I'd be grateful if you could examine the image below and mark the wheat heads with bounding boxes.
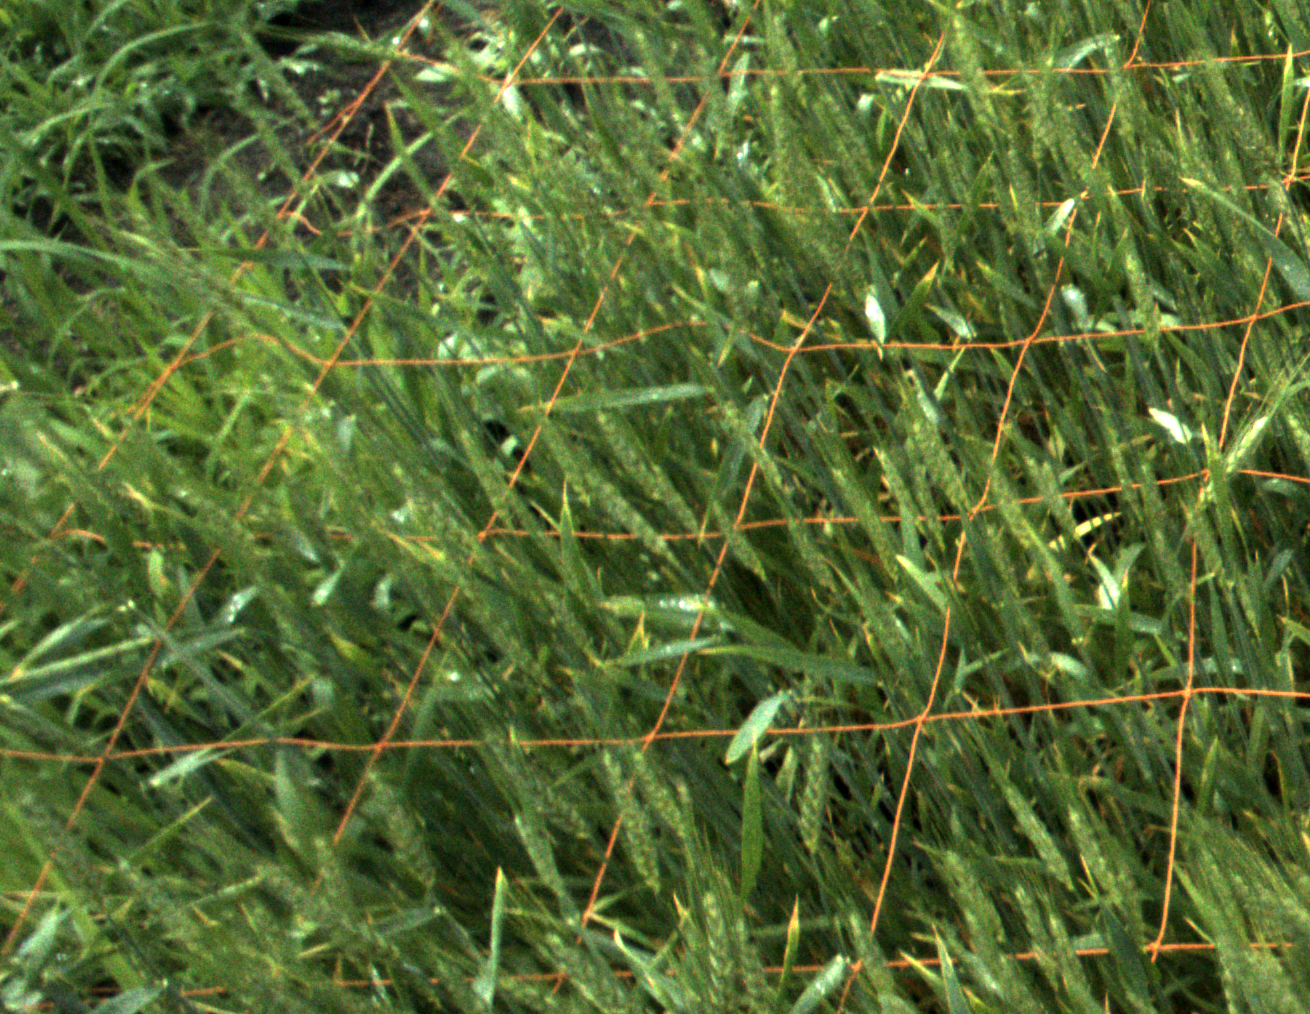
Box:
[119,428,188,490]
[533,400,585,494]
[577,185,628,252]
[1150,137,1199,208]
[600,751,663,890]
[1015,608,1062,681]
[1049,910,1093,995]
[1027,72,1051,159]
[1262,10,1280,46]
[658,594,721,616]
[683,984,752,1014]
[309,26,409,66]
[1201,848,1243,929]
[444,181,513,208]
[736,916,779,1013]
[161,179,229,252]
[364,767,439,892]
[496,970,640,1014]
[1124,250,1165,347]
[942,847,1009,944]
[9,789,118,919]
[1050,99,1091,172]
[1253,326,1301,415]
[1260,948,1310,1014]
[1135,458,1171,534]
[1214,927,1247,1014]
[847,910,897,992]
[744,224,768,272]
[947,42,993,137]
[1258,169,1310,266]
[1183,497,1235,593]
[1234,0,1261,50]
[487,103,535,174]
[1073,0,1097,37]
[648,464,699,532]
[511,813,565,897]
[1066,808,1125,905]
[159,258,239,326]
[945,148,980,224]
[994,287,1021,351]
[800,741,828,858]
[1102,44,1128,96]
[782,513,833,589]
[908,413,976,517]
[983,519,1018,588]
[388,463,485,563]
[831,467,901,581]
[718,396,783,491]
[439,130,494,202]
[428,947,531,1014]
[1150,523,1195,600]
[302,404,360,485]
[211,158,289,241]
[251,572,305,636]
[624,153,677,205]
[243,973,280,1014]
[855,571,903,652]
[676,794,709,874]
[1184,120,1221,182]
[772,11,809,107]
[427,196,494,272]
[726,267,754,328]
[457,421,516,521]
[999,780,1074,890]
[999,959,1110,1014]
[993,0,1018,27]
[713,493,771,579]
[221,904,253,944]
[266,72,317,128]
[1139,156,1157,201]
[768,84,793,203]
[531,921,680,1014]
[1220,146,1253,224]
[336,993,453,1014]
[526,581,592,649]
[1229,560,1259,626]
[630,27,679,114]
[691,182,728,252]
[245,860,415,971]
[1106,432,1142,509]
[138,209,261,332]
[794,166,845,269]
[1003,149,1042,228]
[1113,86,1138,147]
[694,40,737,148]
[121,858,215,970]
[907,458,946,535]
[1119,984,1183,1014]
[1019,70,1060,146]
[582,474,670,554]
[934,191,960,265]
[1259,886,1290,940]
[1011,883,1062,996]
[482,0,533,44]
[1104,0,1147,45]
[1186,187,1231,250]
[164,484,267,566]
[481,730,591,836]
[1112,870,1150,948]
[251,112,304,187]
[1290,409,1310,507]
[835,144,881,221]
[310,836,359,951]
[453,572,556,682]
[251,901,298,957]
[953,13,994,106]
[821,90,876,160]
[631,744,684,831]
[1279,896,1310,1014]
[604,172,666,242]
[482,150,520,214]
[507,0,546,48]
[1043,458,1081,532]
[1197,416,1268,508]
[594,405,663,495]
[1268,0,1309,38]
[123,938,195,1014]
[1287,866,1310,932]
[82,468,159,533]
[266,989,347,1014]
[982,163,1022,230]
[1220,88,1288,172]
[1024,455,1070,530]
[544,129,635,207]
[982,464,1033,540]
[698,887,736,1014]
[1226,871,1261,932]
